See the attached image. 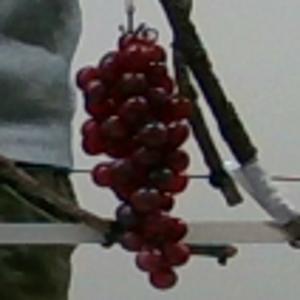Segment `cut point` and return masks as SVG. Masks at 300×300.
Masks as SVG:
<instances>
[{
  "label": "cut point",
  "instance_id": "6a23745f",
  "mask_svg": "<svg viewBox=\"0 0 300 300\" xmlns=\"http://www.w3.org/2000/svg\"><path fill=\"white\" fill-rule=\"evenodd\" d=\"M136 12L137 8L134 0H124L123 15L127 17L126 31L134 32V16Z\"/></svg>",
  "mask_w": 300,
  "mask_h": 300
}]
</instances>
